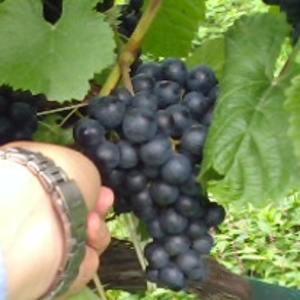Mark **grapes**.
<instances>
[{"label": "grapes", "instance_id": "obj_1", "mask_svg": "<svg viewBox=\"0 0 300 300\" xmlns=\"http://www.w3.org/2000/svg\"><path fill=\"white\" fill-rule=\"evenodd\" d=\"M217 94L215 72L206 65L189 71L178 59L146 62L119 93L92 98L72 129L74 148L115 192L116 211L133 209L149 224L146 279L172 290H182L185 278H207L206 256L215 244L207 228L226 218L195 178Z\"/></svg>", "mask_w": 300, "mask_h": 300}, {"label": "grapes", "instance_id": "obj_2", "mask_svg": "<svg viewBox=\"0 0 300 300\" xmlns=\"http://www.w3.org/2000/svg\"><path fill=\"white\" fill-rule=\"evenodd\" d=\"M42 110V102L31 91L22 92L0 85V144L10 140H29L38 127L35 112Z\"/></svg>", "mask_w": 300, "mask_h": 300}]
</instances>
